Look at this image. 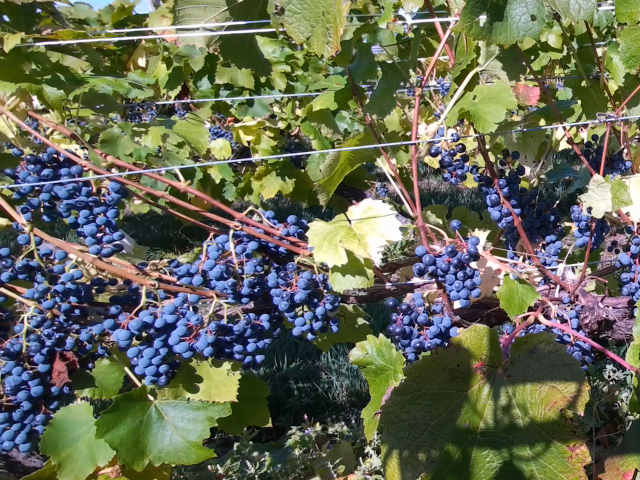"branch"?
Masks as SVG:
<instances>
[{"label":"branch","instance_id":"obj_1","mask_svg":"<svg viewBox=\"0 0 640 480\" xmlns=\"http://www.w3.org/2000/svg\"><path fill=\"white\" fill-rule=\"evenodd\" d=\"M0 204L2 206V208L9 214L12 216V218L17 221L26 231H28L29 233H31L32 235L38 237V238H42L46 241H49L52 245L59 247L60 249H63L67 252L72 253L73 255H75L78 259H81L82 261H85L86 263L93 265L97 268H101L102 270H106L109 271L113 274H116L118 276L121 277H126L127 279H130L131 281H134L136 283H139L147 288H152V289H157V290H164V291H170L173 293H177V292H186L188 294H194V295H199V296H205V297H218L219 296V292L217 290H208V291H202V290H196V289H191L189 287H177L176 285H170V284H166V283H159V282H154V281H149L144 277L138 276L132 272H130L129 270H124V269H120L116 266H113L112 264L109 263H105L103 261H100L98 259L92 258L91 256L81 252L79 249H77L75 246L70 245L68 243L63 242L62 240H59L55 237H53L51 234L41 231L37 228H35L34 226L30 225L23 217H21L19 215V213L12 207H10V205L8 204V202L4 199V197L2 195H0Z\"/></svg>","mask_w":640,"mask_h":480},{"label":"branch","instance_id":"obj_2","mask_svg":"<svg viewBox=\"0 0 640 480\" xmlns=\"http://www.w3.org/2000/svg\"><path fill=\"white\" fill-rule=\"evenodd\" d=\"M477 143H478V145H479V147H480V149L482 151L483 159H484L486 167L488 169L490 178L493 181V185L497 189L498 193L500 194V200L502 201V203H504V205L507 207V209L513 215V226L518 228V232H519V234L521 236L523 245L526 248V250L528 251V253L530 254L531 258H532L531 259L532 264L534 265V267H538L539 271H541L544 275L548 276L553 281H555L557 284H559L562 287L566 288L569 291V295L573 296L575 294V292L577 291V289L580 287V285L582 284L583 280L585 279V277L587 275V268L588 267L586 266V263L589 261V255H590L589 251H590V248H591L592 239H588L587 251L584 252V258H583L584 266L582 267L581 275L579 276L577 282L573 286H571L567 282L559 279L552 272L546 270L545 267L542 265V262L539 260V258L537 257L536 253L534 252V250H533L528 238L526 237V233L522 229L523 218L521 216H517L516 215V212L514 211V209H512V207L510 205V202L508 201V199H506L505 197L502 196L500 188L497 186L498 178L495 175V172L493 170V167H492V164L490 162V158L488 156L487 149H486V146L484 145L482 137H477Z\"/></svg>","mask_w":640,"mask_h":480},{"label":"branch","instance_id":"obj_3","mask_svg":"<svg viewBox=\"0 0 640 480\" xmlns=\"http://www.w3.org/2000/svg\"><path fill=\"white\" fill-rule=\"evenodd\" d=\"M109 180L110 181H114V182H122V183H124V184H126L128 186L140 189L145 193L153 194V195H155L156 197H159V198H164L166 200H169L171 202L176 203L180 207L187 208L188 210L193 211V212L198 213V214H201V215H203V216H205L207 218L216 220V221H218V222H220L222 224H226V225L232 226L234 228H237L239 230H242V231L254 236L255 238H263L265 241L274 243L275 245H277L279 247H283L285 249H288V250H291V251H294V252L300 253V254H304L305 253V250L303 248H299V247L287 244L286 242H282V241H280V240H278V239H276L274 237H270L265 233H258L255 230L250 229L249 227H247L245 225H242L240 223L234 222V221L229 220V219H224V218H222V217H220V216H218L216 214H212V213L207 212V211H205L203 209H200V208H197L195 206H192L188 202H183L180 199L175 198L174 196H171L168 193H165L163 191L150 189V188H148V187H146V186H144L142 184L130 181V180L126 179L125 177H114V178H109Z\"/></svg>","mask_w":640,"mask_h":480},{"label":"branch","instance_id":"obj_4","mask_svg":"<svg viewBox=\"0 0 640 480\" xmlns=\"http://www.w3.org/2000/svg\"><path fill=\"white\" fill-rule=\"evenodd\" d=\"M380 152L383 154V157L385 159V162L387 164V166L389 167V169L391 170V172L393 173L394 177L398 180V184L400 186L401 189V193L404 197L405 202L407 203L408 207L411 210V214L413 216L414 219H417V225H418V229L420 230V240L422 242V244L424 245V248L427 251L431 250V247L425 237V230L429 233V236L431 238V240L435 243L438 244L439 243V239L436 237L434 230L430 227V226H426L425 228L424 226V220L422 219V208H421V204H420V194H419V186H418V178H417V145H411V152H412V185H413V189H414V196H415V206L412 202V200L410 199L408 192L406 191V186L404 184L403 178L402 176L398 173V170L396 169V167L394 166V164L391 162V159L388 155V152L385 148L380 149Z\"/></svg>","mask_w":640,"mask_h":480},{"label":"branch","instance_id":"obj_5","mask_svg":"<svg viewBox=\"0 0 640 480\" xmlns=\"http://www.w3.org/2000/svg\"><path fill=\"white\" fill-rule=\"evenodd\" d=\"M143 176H144V177L151 178V179H154V180L162 181V182L166 183L167 185L174 186V187L178 188V191H179L181 194L191 193V194H193V195H196L197 197H199V198H201V199H203V200H205V201L209 202V203H210V204H212L213 206H215V207H217V208H220V209H222V210L226 211L227 213L231 214L232 216L236 217V220H237V221L242 220V221H244V222H246V223H249V224H251V225H253V226H255V227H258V228H260V229H262V230H264V231H266V232H268V233L276 234V235H278L280 238H283V239H285V240H287V241H290V242H292V243H295L296 245H299V246H302V247H305V248H308V247H309V244H308L307 242H305V241H301V240H299V239H297V238H294V237H292V236H290V235H282V234H281V230H279V229H275V228H271V227H269V226H266V225H265V224H263V223H260V222H258V221H256V220H253V219H251V218H248V217L244 216L243 214H241V213H239V212H237V211H234V210H233V209H231L229 206H227V205H225V204H222V203L217 202L215 199H213L212 197H210V196H209L207 193H205V192H199L198 190H196V189H194V188H189L186 184H181V183H179V182H176V181L170 180V179H168V178H166V177H164V176H161V175H156V174H153V173H149V174H143Z\"/></svg>","mask_w":640,"mask_h":480},{"label":"branch","instance_id":"obj_6","mask_svg":"<svg viewBox=\"0 0 640 480\" xmlns=\"http://www.w3.org/2000/svg\"><path fill=\"white\" fill-rule=\"evenodd\" d=\"M435 28L436 31L441 39V43L439 45V47L437 48V50L435 51V53L430 57V60L428 61L427 64V68L425 70V73L423 75V78L421 79V81L418 83L416 89H415V102H414V113H413V119H412V133H411V139L412 140H417V122H418V116L420 113L419 110V104H420V91L422 89V87L424 86V84L427 82L428 77L432 71V68L434 67V63L435 60L440 56L442 50L445 48V50L447 51V54L449 56L450 62L452 64L456 63V59L454 57L452 48L450 47V45L448 44V38L450 36V34L453 31V27L449 26L446 30L445 33H443L442 28L440 26V22H435Z\"/></svg>","mask_w":640,"mask_h":480},{"label":"branch","instance_id":"obj_7","mask_svg":"<svg viewBox=\"0 0 640 480\" xmlns=\"http://www.w3.org/2000/svg\"><path fill=\"white\" fill-rule=\"evenodd\" d=\"M0 111L3 112L4 114H6L8 117H10L19 126H21L22 129L26 130V132L29 135H31L32 137L38 139L43 144L51 147L52 149L58 151L59 153L64 154L65 156L69 157L71 160L75 161L76 163H78V164H80V165H82L84 167H87L90 170H93L98 174H107L108 173L107 170L100 169L99 167L80 159L78 156L74 155L70 151L58 146L57 144H55L52 141H49L48 139L43 137L41 134L36 133L34 130H32L27 124H25L20 118H18L13 112L8 110L7 108H5L3 106H0Z\"/></svg>","mask_w":640,"mask_h":480},{"label":"branch","instance_id":"obj_8","mask_svg":"<svg viewBox=\"0 0 640 480\" xmlns=\"http://www.w3.org/2000/svg\"><path fill=\"white\" fill-rule=\"evenodd\" d=\"M514 49H515L516 53L518 54V56L520 57V59L522 60V63L525 65L526 69L531 73L533 81L538 85L540 90L545 95V98L547 99V102L550 105V108L552 110V114H553L554 118L559 122V124H563L564 120L559 115V113L557 111V107H556V105H555V103H554V101H553V99H552V97L550 95V92L547 90L545 85L539 80L535 69L531 66V64L527 60L526 56L523 54V51L521 50L520 46L518 44H515L514 45Z\"/></svg>","mask_w":640,"mask_h":480},{"label":"branch","instance_id":"obj_9","mask_svg":"<svg viewBox=\"0 0 640 480\" xmlns=\"http://www.w3.org/2000/svg\"><path fill=\"white\" fill-rule=\"evenodd\" d=\"M131 195H133L135 197H138L141 200H143V201H145V202H147V203H149V204H151L153 206L165 209L166 211L172 213V215H175L176 217H179V218L185 219L186 221H190L192 223L200 225V226L204 227L206 230L212 231L213 233L220 234V235H224V234L227 233V230L211 227L210 225L204 224L203 222H199L198 220H194L193 218H190V217H188V216H186L184 214H180V213L176 212L175 210H173V209H171V208H169L167 206H164L162 204H158L156 202H153L152 200L142 196L141 194H137L135 192H131Z\"/></svg>","mask_w":640,"mask_h":480},{"label":"branch","instance_id":"obj_10","mask_svg":"<svg viewBox=\"0 0 640 480\" xmlns=\"http://www.w3.org/2000/svg\"><path fill=\"white\" fill-rule=\"evenodd\" d=\"M27 115L29 117H32V118L38 119V120H40V121H42L44 123H47L50 128L56 129V130L62 132L63 134L72 137L82 147L86 146V142L81 137H79L75 132H72V131L66 129L65 127H63L59 123H57V122H55V121H53V120H51L49 118H46V117L42 116L41 114H37L35 112H32L31 110L27 111Z\"/></svg>","mask_w":640,"mask_h":480},{"label":"branch","instance_id":"obj_11","mask_svg":"<svg viewBox=\"0 0 640 480\" xmlns=\"http://www.w3.org/2000/svg\"><path fill=\"white\" fill-rule=\"evenodd\" d=\"M611 129L613 130L616 140L618 141L619 144L623 143V139L621 137V134L618 130L617 126H613L612 122H608L607 126H606V131H605V138L603 141V145H602V154H601V164H600V171L599 174L603 175L604 174V169H605V164H606V154L608 151V143L610 140V134H611Z\"/></svg>","mask_w":640,"mask_h":480},{"label":"branch","instance_id":"obj_12","mask_svg":"<svg viewBox=\"0 0 640 480\" xmlns=\"http://www.w3.org/2000/svg\"><path fill=\"white\" fill-rule=\"evenodd\" d=\"M602 87L604 89V92L608 96L611 108L615 109V114L616 115H619L620 111H621V108L624 105L628 104L640 92V85H637L636 88L629 94V96H627L624 100L620 101L616 106L613 94H612L611 90L609 89L606 80L602 81Z\"/></svg>","mask_w":640,"mask_h":480},{"label":"branch","instance_id":"obj_13","mask_svg":"<svg viewBox=\"0 0 640 480\" xmlns=\"http://www.w3.org/2000/svg\"><path fill=\"white\" fill-rule=\"evenodd\" d=\"M0 292H3L6 296H8L11 300L19 303L20 305H25L30 308H36L38 303L33 300H29L27 298H23L14 292H12L7 286L0 285Z\"/></svg>","mask_w":640,"mask_h":480},{"label":"branch","instance_id":"obj_14","mask_svg":"<svg viewBox=\"0 0 640 480\" xmlns=\"http://www.w3.org/2000/svg\"><path fill=\"white\" fill-rule=\"evenodd\" d=\"M563 135L565 136L566 140L568 141V143L572 146V148L574 149L575 153L577 154V156L579 157L580 161L582 162L583 166L586 168V170L591 173L592 175H595L596 172L588 165V161L585 160V156L582 153V151L580 150L579 146L574 142L573 138L571 137V135L568 132V129H562Z\"/></svg>","mask_w":640,"mask_h":480},{"label":"branch","instance_id":"obj_15","mask_svg":"<svg viewBox=\"0 0 640 480\" xmlns=\"http://www.w3.org/2000/svg\"><path fill=\"white\" fill-rule=\"evenodd\" d=\"M584 27H585V30L589 34V39H590L591 46H592V49H593L594 57H595L596 62H597V67H598L599 70H602L603 69L602 59H601V56H600L599 51H598V47H597V43H596V40H595L593 29L590 27V24H589L588 20L584 21Z\"/></svg>","mask_w":640,"mask_h":480},{"label":"branch","instance_id":"obj_16","mask_svg":"<svg viewBox=\"0 0 640 480\" xmlns=\"http://www.w3.org/2000/svg\"><path fill=\"white\" fill-rule=\"evenodd\" d=\"M93 151L95 153H97L98 155H100L101 157L105 158L106 160L115 163L118 166H123L127 169H131V170H138L140 169L139 166L137 165H133V164H129L125 161H121L120 159H117L109 154H107L106 152H104L103 150H101L100 148H98L97 146L93 147Z\"/></svg>","mask_w":640,"mask_h":480},{"label":"branch","instance_id":"obj_17","mask_svg":"<svg viewBox=\"0 0 640 480\" xmlns=\"http://www.w3.org/2000/svg\"><path fill=\"white\" fill-rule=\"evenodd\" d=\"M346 73L349 79V82L351 84V89L354 95V98L356 100V103L359 107L363 106V102L361 101L360 95L358 93L357 87H356V82L354 80L353 74H352V70L350 68L346 69Z\"/></svg>","mask_w":640,"mask_h":480},{"label":"branch","instance_id":"obj_18","mask_svg":"<svg viewBox=\"0 0 640 480\" xmlns=\"http://www.w3.org/2000/svg\"><path fill=\"white\" fill-rule=\"evenodd\" d=\"M364 118H365V121H366V123H367V125H368L369 129L371 130V132L373 133V135H374V137H375V141H376V143H377V144H380V143H381V139H380L379 132L376 130L375 126L373 125V123H372V121H371V119H370L369 114H368V113H365V114H364Z\"/></svg>","mask_w":640,"mask_h":480},{"label":"branch","instance_id":"obj_19","mask_svg":"<svg viewBox=\"0 0 640 480\" xmlns=\"http://www.w3.org/2000/svg\"><path fill=\"white\" fill-rule=\"evenodd\" d=\"M623 136H624V141H625V144H626L628 160L632 161L633 160V154H632L631 141H630L628 132L624 131L623 132Z\"/></svg>","mask_w":640,"mask_h":480},{"label":"branch","instance_id":"obj_20","mask_svg":"<svg viewBox=\"0 0 640 480\" xmlns=\"http://www.w3.org/2000/svg\"><path fill=\"white\" fill-rule=\"evenodd\" d=\"M617 216L622 220L623 223L629 224L630 220L627 216H625L620 208L616 209Z\"/></svg>","mask_w":640,"mask_h":480}]
</instances>
